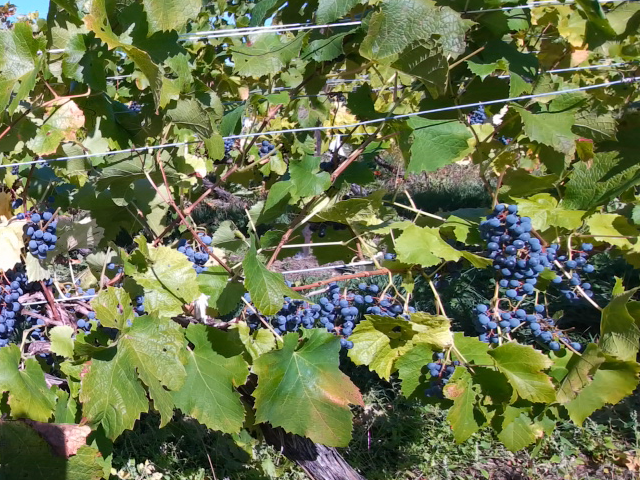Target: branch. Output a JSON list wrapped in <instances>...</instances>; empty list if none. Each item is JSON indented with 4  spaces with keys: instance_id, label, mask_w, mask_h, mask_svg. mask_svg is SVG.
Returning a JSON list of instances; mask_svg holds the SVG:
<instances>
[{
    "instance_id": "branch-5",
    "label": "branch",
    "mask_w": 640,
    "mask_h": 480,
    "mask_svg": "<svg viewBox=\"0 0 640 480\" xmlns=\"http://www.w3.org/2000/svg\"><path fill=\"white\" fill-rule=\"evenodd\" d=\"M386 126V122H381L380 125L373 131L370 133V135L367 137L366 142L363 143L360 147H358L357 149H355L351 154L350 157L345 159L342 163H340L336 169L333 171L332 175L330 176V180L334 181L335 178L337 176L340 175V173L343 171V169L349 165V163L354 162L358 156L361 154V152L363 150H365L372 142L373 138L379 134Z\"/></svg>"
},
{
    "instance_id": "branch-8",
    "label": "branch",
    "mask_w": 640,
    "mask_h": 480,
    "mask_svg": "<svg viewBox=\"0 0 640 480\" xmlns=\"http://www.w3.org/2000/svg\"><path fill=\"white\" fill-rule=\"evenodd\" d=\"M21 313L26 315V316L34 317L36 319H39V320H41V321H43L45 323L51 324V325H55L56 324V321L54 319H50V318L45 317V316H43L41 314H38L36 312H32V311H29V310H26V309H22Z\"/></svg>"
},
{
    "instance_id": "branch-4",
    "label": "branch",
    "mask_w": 640,
    "mask_h": 480,
    "mask_svg": "<svg viewBox=\"0 0 640 480\" xmlns=\"http://www.w3.org/2000/svg\"><path fill=\"white\" fill-rule=\"evenodd\" d=\"M316 202L315 198H311L309 200V202L306 204L305 208L299 213V215L289 224V226L287 227V230L285 231L284 236L281 238L277 249L275 250L274 254L270 257V259L267 261L265 268L269 269L272 264L274 263V261L278 258V256L280 255L282 248L285 244V242L288 240V238L292 235V230L293 228L300 222V220L303 219V217L306 215V213L309 212L310 208L314 205V203Z\"/></svg>"
},
{
    "instance_id": "branch-2",
    "label": "branch",
    "mask_w": 640,
    "mask_h": 480,
    "mask_svg": "<svg viewBox=\"0 0 640 480\" xmlns=\"http://www.w3.org/2000/svg\"><path fill=\"white\" fill-rule=\"evenodd\" d=\"M103 95L102 91H98V92H92V93H71V94H66V95H58V96H54L53 98L47 100L44 103H41L35 107L29 108L27 110H25L23 112V114L18 115L17 117L14 118V120L5 128L2 129V131L0 132V139H2L7 132H9L10 130H12L19 121H21L24 116H28L31 113L37 112L39 110H42L48 106H50L51 104L56 103L57 101L60 100H68V99H73V98H84V99H88V98H94V97H100Z\"/></svg>"
},
{
    "instance_id": "branch-3",
    "label": "branch",
    "mask_w": 640,
    "mask_h": 480,
    "mask_svg": "<svg viewBox=\"0 0 640 480\" xmlns=\"http://www.w3.org/2000/svg\"><path fill=\"white\" fill-rule=\"evenodd\" d=\"M404 273H405L404 269H379V270H375V271L368 270V271L361 272V273L345 274V275L335 276L333 278L321 280V281H318V282L308 283L306 285H300V286H297V287H291L290 291L291 292H300L302 290H308L310 288H316V287L324 286V285H327V284H332V283H335L337 281H342V280H347V279H358V278H363V277H367V276H377V275H382V274H404Z\"/></svg>"
},
{
    "instance_id": "branch-11",
    "label": "branch",
    "mask_w": 640,
    "mask_h": 480,
    "mask_svg": "<svg viewBox=\"0 0 640 480\" xmlns=\"http://www.w3.org/2000/svg\"><path fill=\"white\" fill-rule=\"evenodd\" d=\"M480 180H481V183H482V185H483V187H484L485 191L489 194V196L491 197L492 201H493L494 203H497V202H498V198H497V196L495 195V193L491 190V188H490L489 184H488V183H487V181H486L485 176H484V175H481V176H480Z\"/></svg>"
},
{
    "instance_id": "branch-7",
    "label": "branch",
    "mask_w": 640,
    "mask_h": 480,
    "mask_svg": "<svg viewBox=\"0 0 640 480\" xmlns=\"http://www.w3.org/2000/svg\"><path fill=\"white\" fill-rule=\"evenodd\" d=\"M39 284H40V287H41L42 291L44 292L45 296L47 297V299L50 302V306H51V310H52V316L54 318H57L58 317L57 307H56V303H55V300H54L53 296L51 295L50 291L47 289V286L45 285V281L44 280H40Z\"/></svg>"
},
{
    "instance_id": "branch-1",
    "label": "branch",
    "mask_w": 640,
    "mask_h": 480,
    "mask_svg": "<svg viewBox=\"0 0 640 480\" xmlns=\"http://www.w3.org/2000/svg\"><path fill=\"white\" fill-rule=\"evenodd\" d=\"M258 140L257 136H253L248 143L242 148L241 152L239 153L238 157L235 159V161L233 162L232 167H230L224 174V176L222 178H220L219 180H215L214 181V186L210 187L205 193L201 194L197 199L193 200L190 202V204L181 212L174 203V200L172 199L171 195H170V191H169V185H168V181H167V176L165 175V172L160 164V161L158 159L159 154H160V150L156 151L155 154V161L157 164L158 169L160 170V173L162 174V177L164 179V184L166 187V193H167V198L168 200L171 202V206L173 208V210H175V212H177V216L166 226V228L156 237V239L152 242V246L156 247L160 241L170 232V230L182 219V221L186 224L188 230L190 231V233L192 234V237L195 239V241L202 247H204L206 249V251L209 253V255L216 260V262L223 268L225 269L229 274H232V271L230 270V268H228L226 265H224V263L210 250V248L204 244L203 242H201V240L196 236L194 230L192 229L190 223L188 222V220L185 218V216L193 209V207L199 203H201L204 199H206L216 188L217 185H221L224 182L227 181V179L229 178V176L234 173L238 167V164L240 163V161L243 159L244 155L246 154V152L251 148V146Z\"/></svg>"
},
{
    "instance_id": "branch-6",
    "label": "branch",
    "mask_w": 640,
    "mask_h": 480,
    "mask_svg": "<svg viewBox=\"0 0 640 480\" xmlns=\"http://www.w3.org/2000/svg\"><path fill=\"white\" fill-rule=\"evenodd\" d=\"M36 168V164L34 165H30L29 170H28V174L26 177V181L24 183V186L22 188V203H23V212L27 213L28 212V201H27V191L29 188V185L31 184V180H32V176H33V172Z\"/></svg>"
},
{
    "instance_id": "branch-10",
    "label": "branch",
    "mask_w": 640,
    "mask_h": 480,
    "mask_svg": "<svg viewBox=\"0 0 640 480\" xmlns=\"http://www.w3.org/2000/svg\"><path fill=\"white\" fill-rule=\"evenodd\" d=\"M282 107H283V104L282 103H278L276 105V107L263 119V121L261 122V124L257 128V131L263 130L265 128L266 124L270 121V119L273 116H275Z\"/></svg>"
},
{
    "instance_id": "branch-9",
    "label": "branch",
    "mask_w": 640,
    "mask_h": 480,
    "mask_svg": "<svg viewBox=\"0 0 640 480\" xmlns=\"http://www.w3.org/2000/svg\"><path fill=\"white\" fill-rule=\"evenodd\" d=\"M575 290L576 292L581 296L582 299H584L586 302L590 303L593 307H595L598 311L602 310V306L600 304H598L594 299L590 298L588 295H586L582 289L580 288L579 285L575 286Z\"/></svg>"
},
{
    "instance_id": "branch-12",
    "label": "branch",
    "mask_w": 640,
    "mask_h": 480,
    "mask_svg": "<svg viewBox=\"0 0 640 480\" xmlns=\"http://www.w3.org/2000/svg\"><path fill=\"white\" fill-rule=\"evenodd\" d=\"M554 265L562 273V275L565 276L566 279H570L571 278L570 273L566 271V269L560 264V262L558 260L554 261Z\"/></svg>"
}]
</instances>
